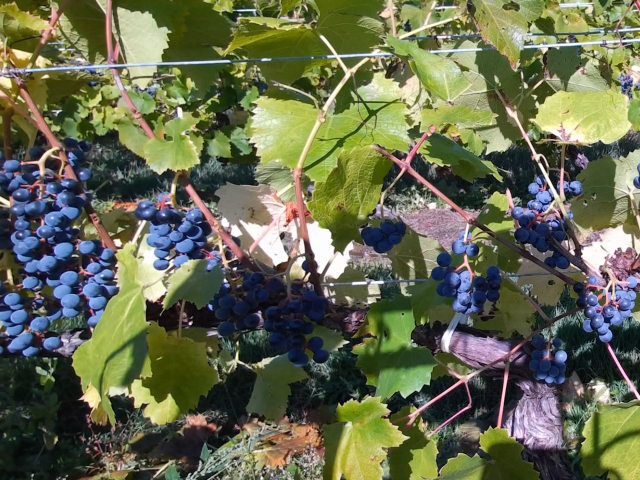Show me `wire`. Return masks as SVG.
<instances>
[{"label": "wire", "instance_id": "obj_1", "mask_svg": "<svg viewBox=\"0 0 640 480\" xmlns=\"http://www.w3.org/2000/svg\"><path fill=\"white\" fill-rule=\"evenodd\" d=\"M394 56L386 53H346L340 55L295 54L291 57H248L242 59L211 58L185 61L128 62L119 64H78L47 68H26L18 70L0 69V76L20 77L28 75H49L58 73H76L80 71H121L131 69L187 68L213 65L244 66L250 64H293L297 61L342 62L348 60H388Z\"/></svg>", "mask_w": 640, "mask_h": 480}, {"label": "wire", "instance_id": "obj_2", "mask_svg": "<svg viewBox=\"0 0 640 480\" xmlns=\"http://www.w3.org/2000/svg\"><path fill=\"white\" fill-rule=\"evenodd\" d=\"M630 43H640V36H628L621 38L602 39L598 41H561V42H542V43H526L524 49L526 51L544 50V49H563V48H600L612 45H624Z\"/></svg>", "mask_w": 640, "mask_h": 480}, {"label": "wire", "instance_id": "obj_3", "mask_svg": "<svg viewBox=\"0 0 640 480\" xmlns=\"http://www.w3.org/2000/svg\"><path fill=\"white\" fill-rule=\"evenodd\" d=\"M427 277H411L407 279H371V280H345L332 279L321 280V287L347 288V287H373V286H409L413 284H427Z\"/></svg>", "mask_w": 640, "mask_h": 480}, {"label": "wire", "instance_id": "obj_4", "mask_svg": "<svg viewBox=\"0 0 640 480\" xmlns=\"http://www.w3.org/2000/svg\"><path fill=\"white\" fill-rule=\"evenodd\" d=\"M495 51H496V48L494 46H484V47H474V48H453V49L430 48L428 50V53L430 55L455 56V55L487 54V53H494Z\"/></svg>", "mask_w": 640, "mask_h": 480}]
</instances>
